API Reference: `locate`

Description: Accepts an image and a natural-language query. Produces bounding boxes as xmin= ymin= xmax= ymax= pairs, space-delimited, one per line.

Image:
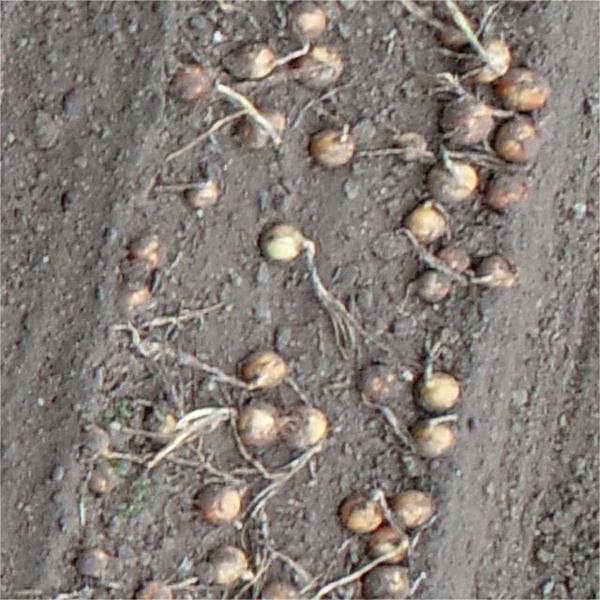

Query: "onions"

xmin=263 ymin=580 xmax=301 ymax=600
xmin=475 ymin=253 xmax=515 ymax=289
xmin=484 ymin=168 xmax=531 ymax=211
xmin=418 ymin=372 xmax=457 ymax=411
xmin=195 ymin=484 xmax=244 ymax=523
xmin=494 ymin=115 xmax=537 ymax=161
xmin=413 ymin=415 xmax=454 ymax=455
xmin=389 ymin=489 xmax=431 ymax=528
xmin=239 ymin=348 xmax=285 ymax=389
xmin=406 ymin=202 xmax=446 ymax=242
xmin=261 ymin=222 xmax=301 ymax=262
xmin=338 ymin=491 xmax=381 ymax=532
xmin=290 ymin=4 xmax=327 ymax=39
xmin=365 ymin=563 xmax=409 ymax=596
xmin=462 ymin=222 xmax=498 ymax=254
xmin=414 ymin=269 xmax=448 ymax=304
xmin=92 ymin=467 xmax=116 ymax=492
xmin=248 ymin=43 xmax=277 ymax=79
xmin=435 ymin=240 xmax=468 ymax=276
xmin=168 ymin=64 xmax=207 ymax=102
xmin=122 ymin=284 xmax=153 ymax=312
xmin=361 ymin=365 xmax=409 ymax=410
xmin=185 ymin=174 xmax=219 ymax=209
xmin=395 ymin=130 xmax=427 ymax=161
xmin=296 ymin=41 xmax=341 ymax=86
xmin=235 ymin=110 xmax=277 ymax=148
xmin=471 ymin=37 xmax=511 ymax=80
xmin=208 ymin=545 xmax=246 ymax=584
xmin=138 ymin=578 xmax=173 ymax=599
xmin=128 ymin=235 xmax=160 ymax=264
xmin=499 ymin=66 xmax=547 ymax=109
xmin=312 ymin=125 xmax=352 ymax=167
xmin=430 ymin=158 xmax=478 ymax=203
xmin=239 ymin=401 xmax=281 ymax=450
xmin=445 ymin=96 xmax=492 ymax=145
xmin=77 ymin=546 xmax=109 ymax=577
xmin=371 ymin=524 xmax=409 ymax=562
xmin=441 ymin=21 xmax=474 ymax=44
xmin=156 ymin=410 xmax=193 ymax=444
xmin=276 ymin=406 xmax=324 ymax=451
